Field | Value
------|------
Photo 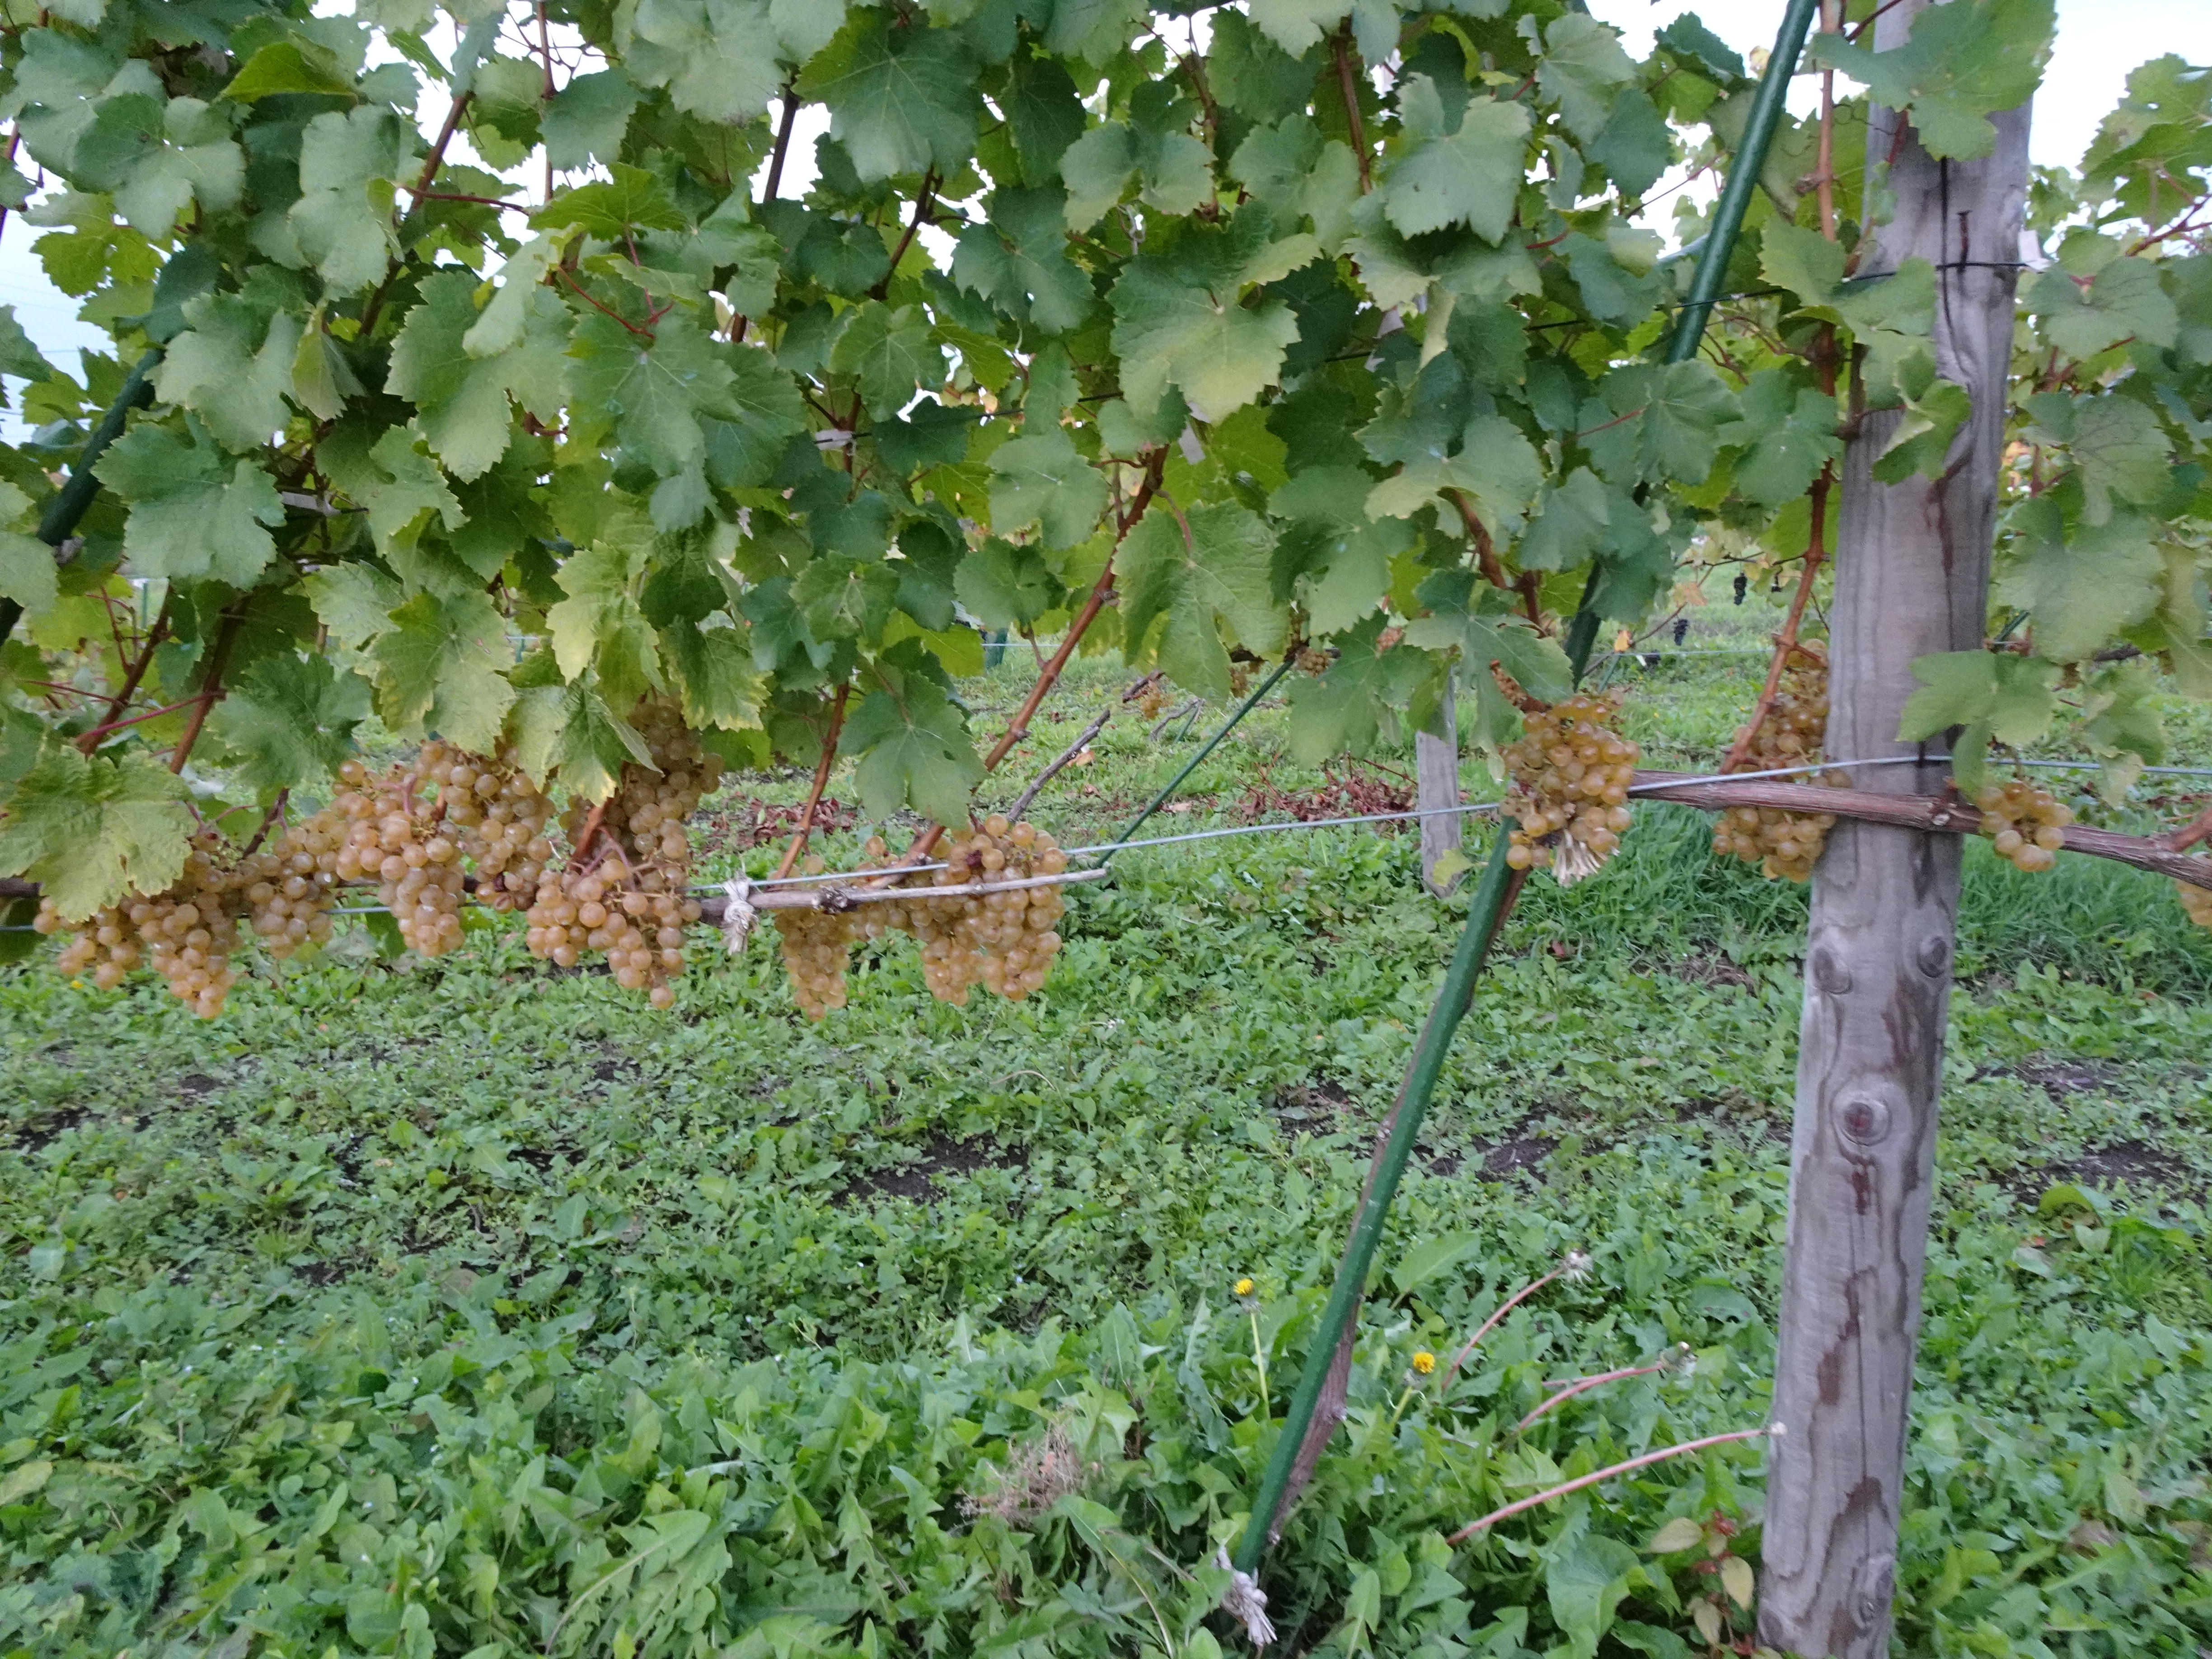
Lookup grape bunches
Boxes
[932,817,1068,1002]
[33,894,140,990]
[466,769,556,914]
[634,697,727,792]
[1733,636,1840,785]
[1944,781,2074,872]
[1672,614,1691,648]
[269,752,436,878]
[556,793,596,849]
[2060,662,2085,692]
[639,868,706,972]
[1137,680,1177,724]
[1221,663,1256,702]
[578,855,678,1012]
[1730,568,1753,607]
[377,740,496,819]
[1292,642,1341,680]
[176,827,236,892]
[901,863,991,1009]
[1710,805,1844,888]
[123,884,240,1021]
[2178,849,2212,929]
[847,836,918,940]
[235,852,336,961]
[524,868,584,969]
[1504,693,1644,871]
[623,762,698,862]
[765,852,861,1020]
[361,816,474,962]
